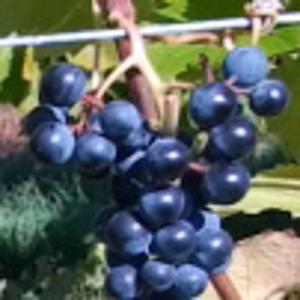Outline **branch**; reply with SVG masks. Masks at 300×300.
<instances>
[{
    "label": "branch",
    "instance_id": "1",
    "mask_svg": "<svg viewBox=\"0 0 300 300\" xmlns=\"http://www.w3.org/2000/svg\"><path fill=\"white\" fill-rule=\"evenodd\" d=\"M124 77L128 80L127 88L131 91L138 110L149 121L156 122L159 119L158 107L145 77L136 66L128 67Z\"/></svg>",
    "mask_w": 300,
    "mask_h": 300
},
{
    "label": "branch",
    "instance_id": "3",
    "mask_svg": "<svg viewBox=\"0 0 300 300\" xmlns=\"http://www.w3.org/2000/svg\"><path fill=\"white\" fill-rule=\"evenodd\" d=\"M97 4L99 12L104 16H108L111 11H116L127 14L135 23L139 21L137 8L132 0H97Z\"/></svg>",
    "mask_w": 300,
    "mask_h": 300
},
{
    "label": "branch",
    "instance_id": "2",
    "mask_svg": "<svg viewBox=\"0 0 300 300\" xmlns=\"http://www.w3.org/2000/svg\"><path fill=\"white\" fill-rule=\"evenodd\" d=\"M214 291L222 300H243V297L227 274L214 275L211 278Z\"/></svg>",
    "mask_w": 300,
    "mask_h": 300
}]
</instances>
